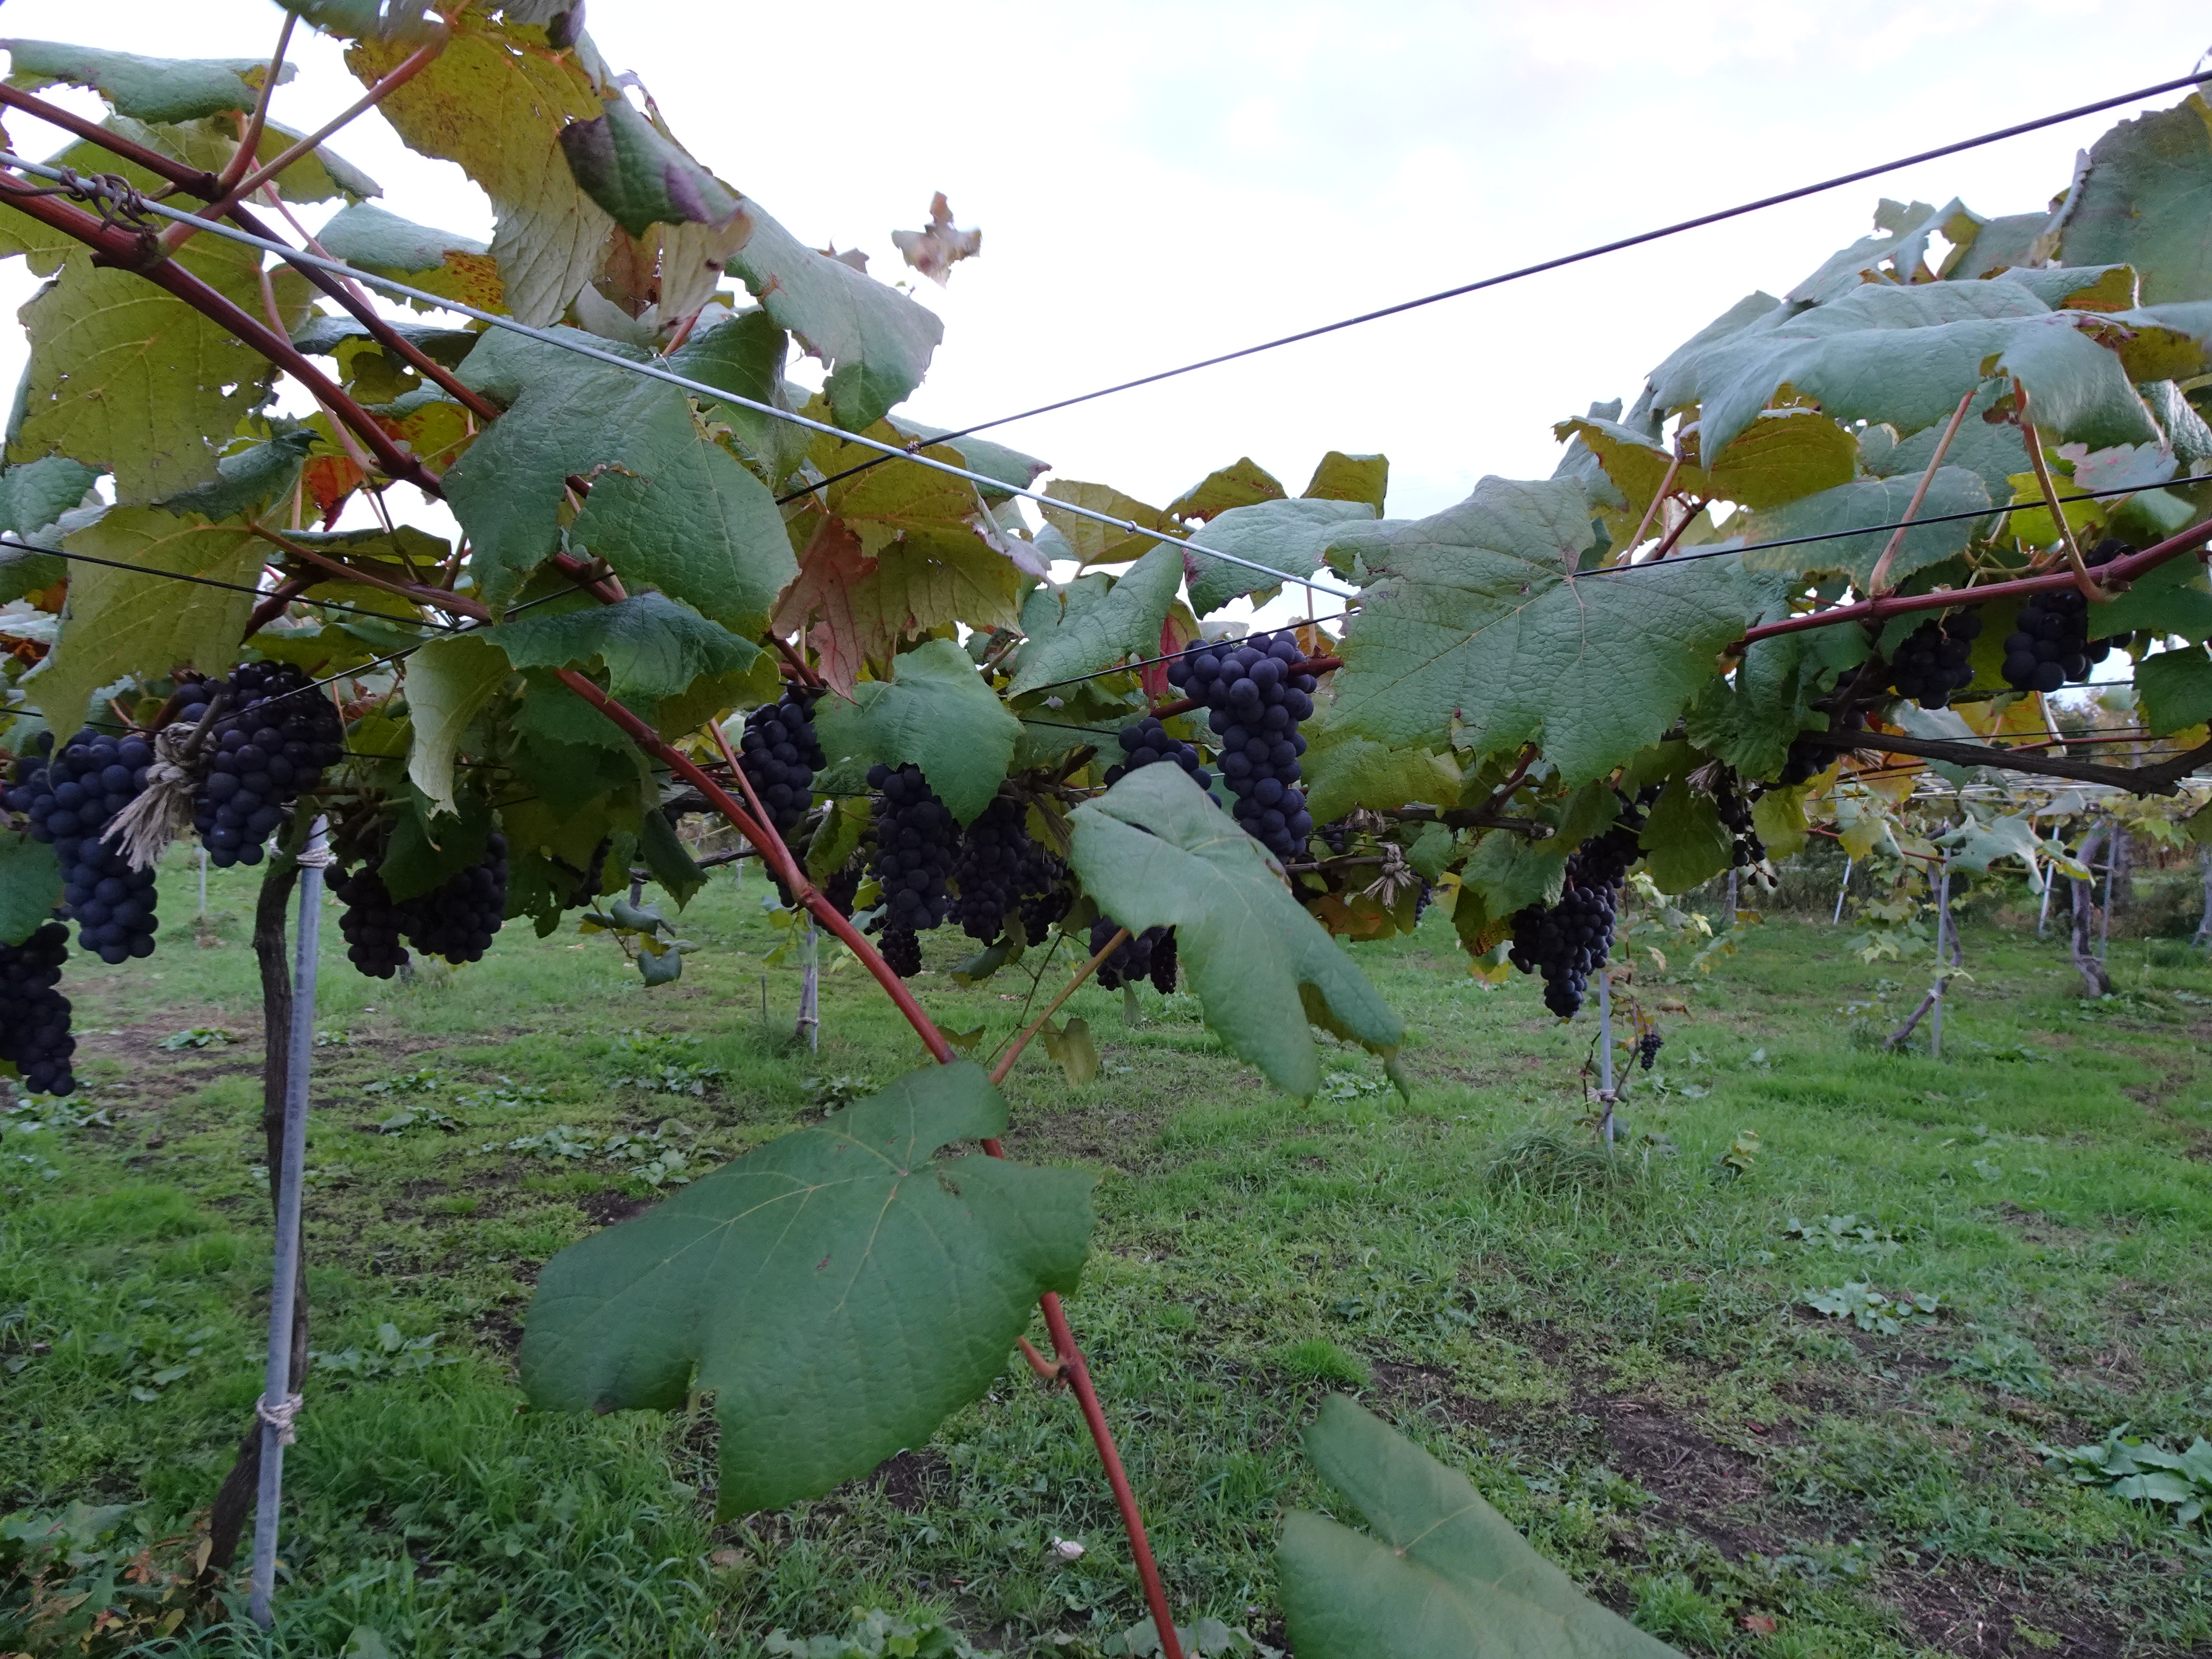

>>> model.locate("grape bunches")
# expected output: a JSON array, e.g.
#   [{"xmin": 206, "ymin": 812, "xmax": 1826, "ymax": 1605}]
[
  {"xmin": 1149, "ymin": 933, "xmax": 1178, "ymax": 995},
  {"xmin": 1893, "ymin": 606, "xmax": 1984, "ymax": 709},
  {"xmin": 1121, "ymin": 957, "xmax": 1151, "ymax": 981},
  {"xmin": 1542, "ymin": 887, "xmax": 1615, "ymax": 1019},
  {"xmin": 1508, "ymin": 904, "xmax": 1547, "ymax": 975},
  {"xmin": 1011, "ymin": 846, "xmax": 1066, "ymax": 896},
  {"xmin": 546, "ymin": 834, "xmax": 610, "ymax": 910},
  {"xmin": 1096, "ymin": 961, "xmax": 1122, "ymax": 991},
  {"xmin": 1711, "ymin": 763, "xmax": 1778, "ymax": 887},
  {"xmin": 1777, "ymin": 685, "xmax": 1864, "ymax": 786},
  {"xmin": 3, "ymin": 729, "xmax": 158, "ymax": 964},
  {"xmin": 757, "ymin": 850, "xmax": 810, "ymax": 908},
  {"xmin": 732, "ymin": 680, "xmax": 828, "ymax": 841},
  {"xmin": 324, "ymin": 864, "xmax": 409, "ymax": 979},
  {"xmin": 1833, "ymin": 615, "xmax": 1893, "ymax": 710},
  {"xmin": 445, "ymin": 833, "xmax": 509, "ymax": 965},
  {"xmin": 863, "ymin": 876, "xmax": 894, "ymax": 935},
  {"xmin": 1054, "ymin": 888, "xmax": 1073, "ymax": 922},
  {"xmin": 1166, "ymin": 628, "xmax": 1316, "ymax": 857},
  {"xmin": 1636, "ymin": 1030, "xmax": 1666, "ymax": 1073},
  {"xmin": 1409, "ymin": 869, "xmax": 1432, "ymax": 926},
  {"xmin": 966, "ymin": 779, "xmax": 1030, "ymax": 886},
  {"xmin": 954, "ymin": 838, "xmax": 1011, "ymax": 946},
  {"xmin": 1018, "ymin": 895, "xmax": 1053, "ymax": 947},
  {"xmin": 1089, "ymin": 914, "xmax": 1167, "ymax": 970},
  {"xmin": 865, "ymin": 761, "xmax": 962, "ymax": 930},
  {"xmin": 1564, "ymin": 851, "xmax": 1624, "ymax": 912},
  {"xmin": 170, "ymin": 659, "xmax": 344, "ymax": 869},
  {"xmin": 0, "ymin": 923, "xmax": 76, "ymax": 1096},
  {"xmin": 1580, "ymin": 788, "xmax": 1653, "ymax": 882},
  {"xmin": 2001, "ymin": 536, "xmax": 2139, "ymax": 692},
  {"xmin": 399, "ymin": 885, "xmax": 445, "ymax": 955},
  {"xmin": 877, "ymin": 922, "xmax": 922, "ymax": 977},
  {"xmin": 814, "ymin": 855, "xmax": 865, "ymax": 936},
  {"xmin": 1102, "ymin": 717, "xmax": 1222, "ymax": 808}
]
